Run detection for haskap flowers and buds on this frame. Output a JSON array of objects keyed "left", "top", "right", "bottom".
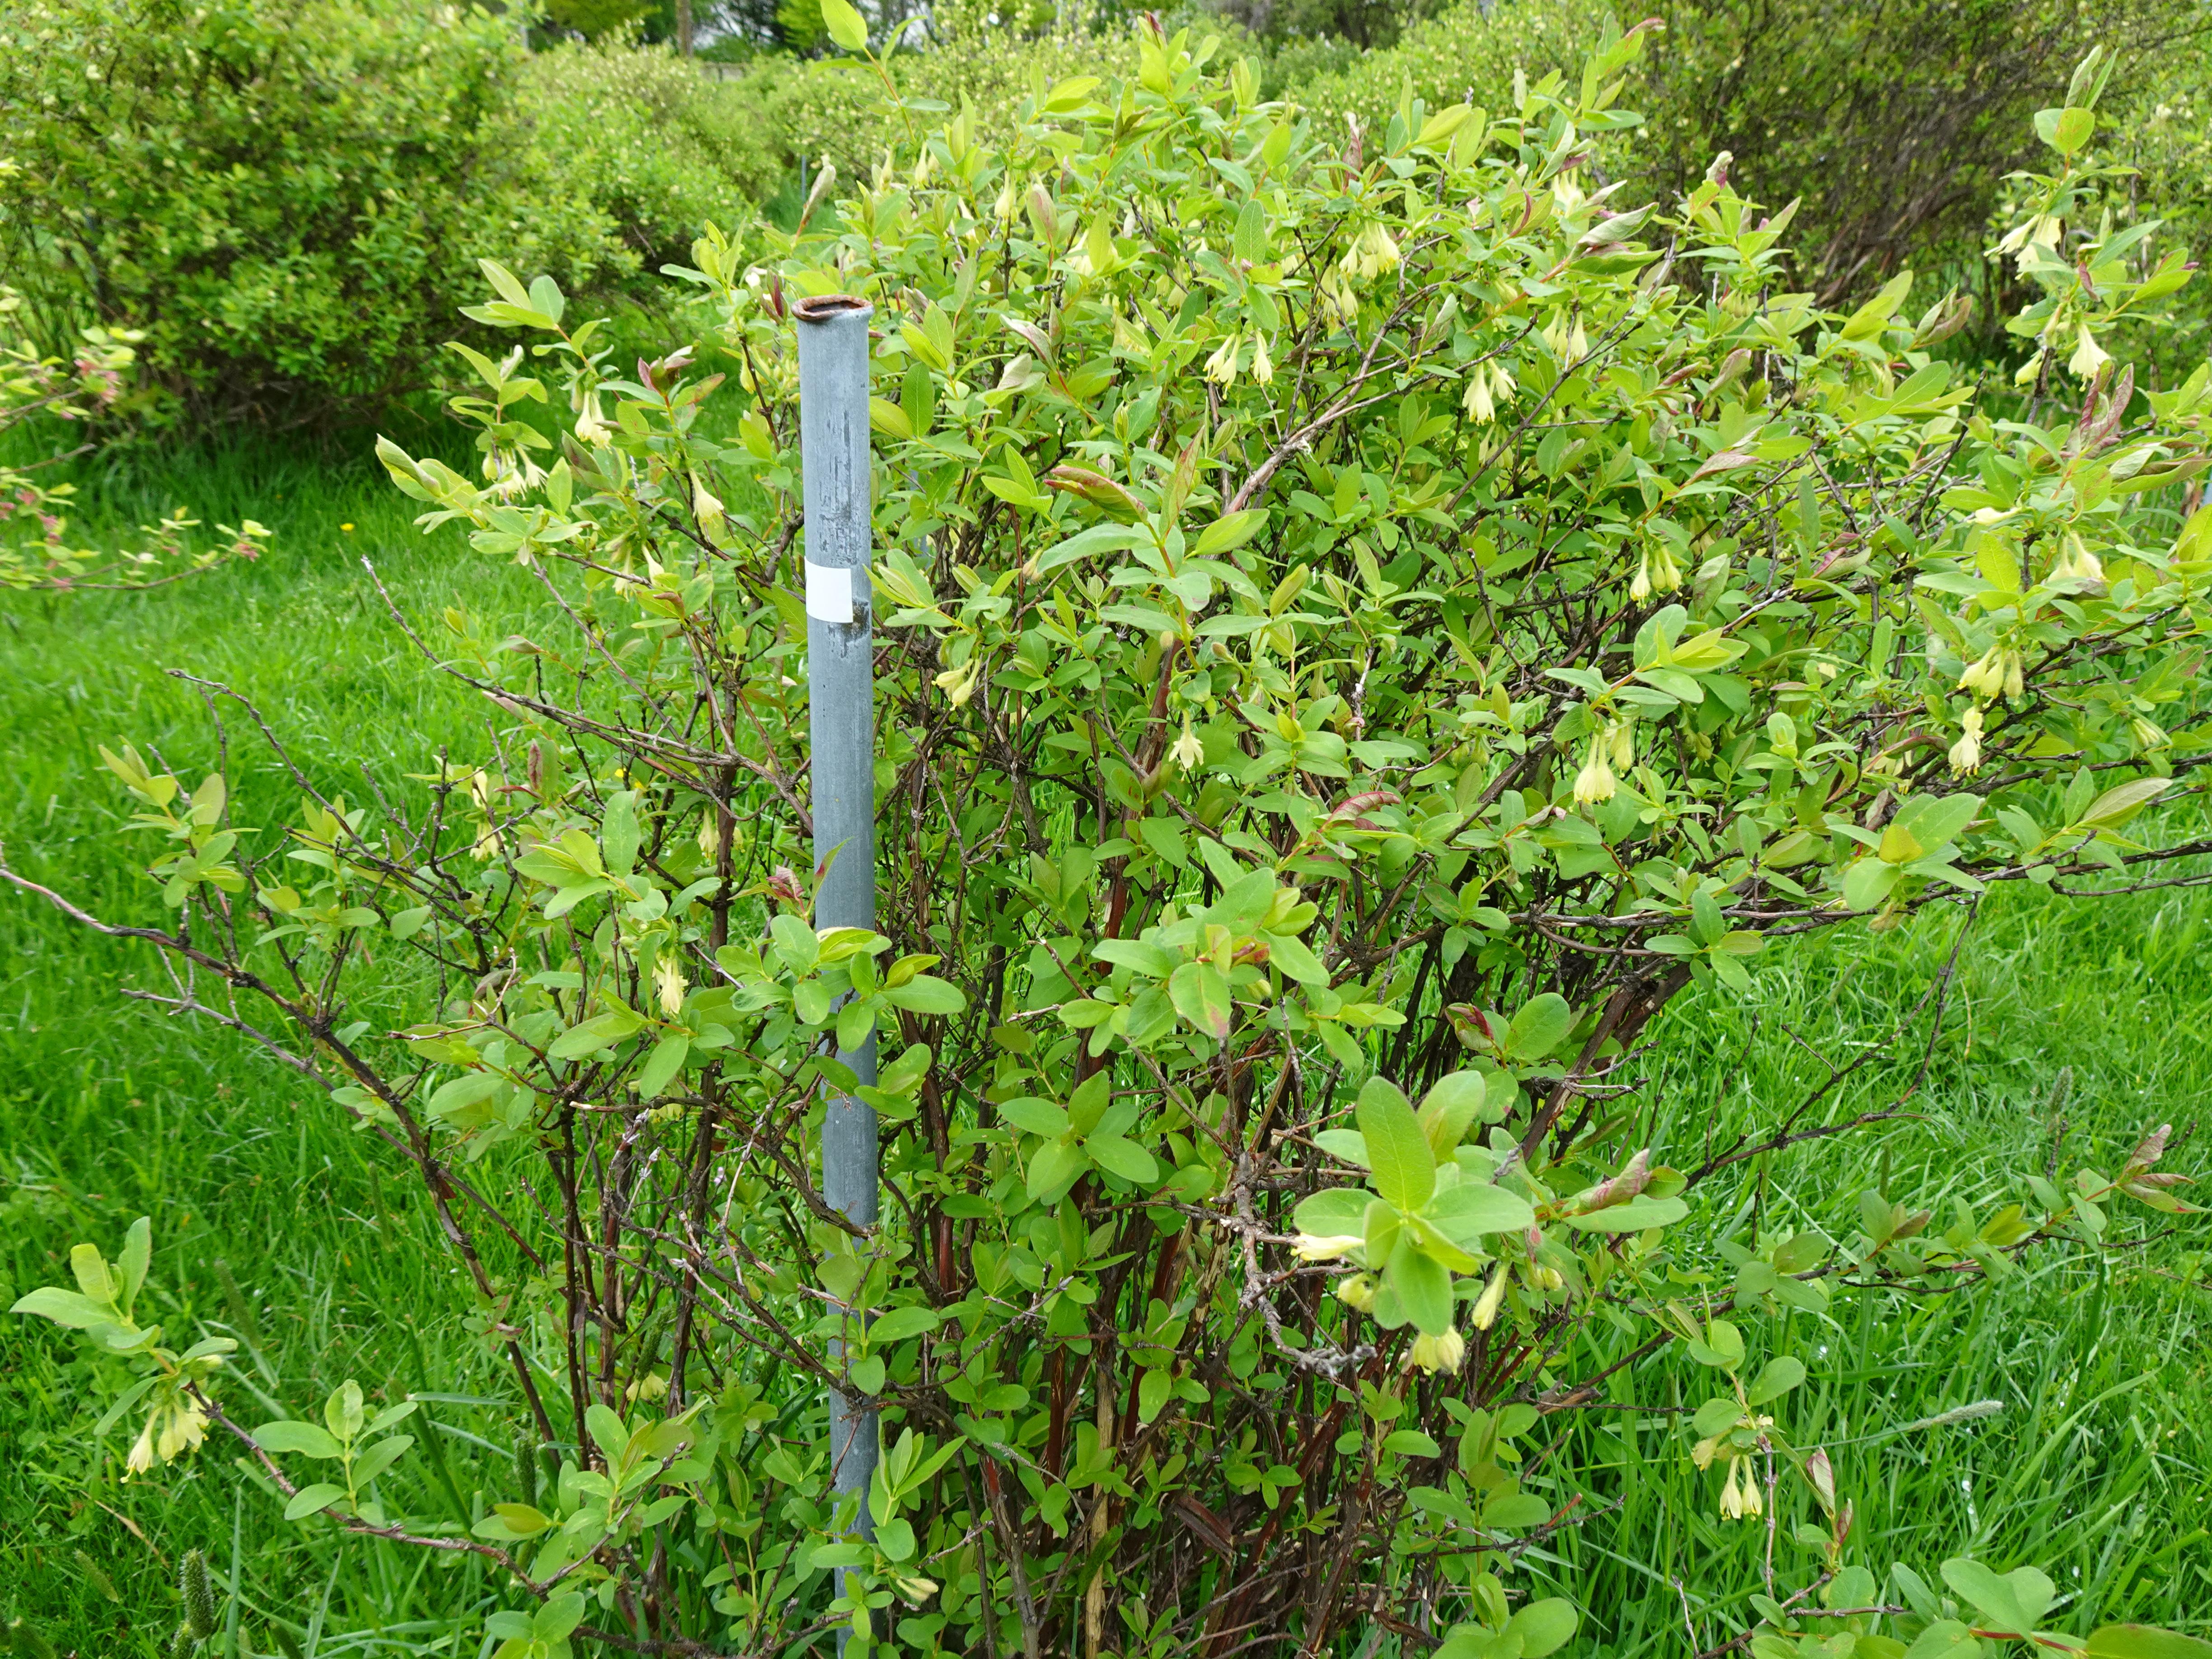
[
  {"left": 1662, "top": 547, "right": 1683, "bottom": 591},
  {"left": 592, "top": 394, "right": 613, "bottom": 450},
  {"left": 1411, "top": 1331, "right": 1440, "bottom": 1374},
  {"left": 2046, "top": 534, "right": 2073, "bottom": 585},
  {"left": 930, "top": 659, "right": 970, "bottom": 686},
  {"left": 482, "top": 820, "right": 509, "bottom": 857},
  {"left": 1322, "top": 267, "right": 1341, "bottom": 323},
  {"left": 1572, "top": 735, "right": 1599, "bottom": 803},
  {"left": 174, "top": 1398, "right": 206, "bottom": 1451},
  {"left": 1251, "top": 329, "right": 1272, "bottom": 383},
  {"left": 1078, "top": 254, "right": 1094, "bottom": 276},
  {"left": 1593, "top": 734, "right": 1615, "bottom": 801},
  {"left": 640, "top": 1379, "right": 654, "bottom": 1399},
  {"left": 901, "top": 1572, "right": 941, "bottom": 1595},
  {"left": 914, "top": 142, "right": 927, "bottom": 184},
  {"left": 2083, "top": 324, "right": 2111, "bottom": 372},
  {"left": 894, "top": 1578, "right": 928, "bottom": 1603},
  {"left": 1314, "top": 264, "right": 1333, "bottom": 305},
  {"left": 472, "top": 821, "right": 488, "bottom": 861},
  {"left": 1155, "top": 274, "right": 1171, "bottom": 296},
  {"left": 948, "top": 660, "right": 979, "bottom": 709},
  {"left": 1204, "top": 332, "right": 1236, "bottom": 383},
  {"left": 1462, "top": 361, "right": 1494, "bottom": 425},
  {"left": 1486, "top": 358, "right": 1516, "bottom": 400},
  {"left": 1023, "top": 548, "right": 1041, "bottom": 578},
  {"left": 1158, "top": 200, "right": 1167, "bottom": 222},
  {"left": 1152, "top": 199, "right": 1163, "bottom": 223},
  {"left": 1066, "top": 229, "right": 1088, "bottom": 268},
  {"left": 641, "top": 543, "right": 665, "bottom": 588},
  {"left": 2005, "top": 652, "right": 2024, "bottom": 698},
  {"left": 1196, "top": 228, "right": 1209, "bottom": 256},
  {"left": 1476, "top": 1263, "right": 1510, "bottom": 1328},
  {"left": 626, "top": 1378, "right": 639, "bottom": 1401},
  {"left": 1948, "top": 705, "right": 1982, "bottom": 779},
  {"left": 957, "top": 197, "right": 977, "bottom": 239},
  {"left": 1980, "top": 650, "right": 2009, "bottom": 697},
  {"left": 1549, "top": 173, "right": 1567, "bottom": 215},
  {"left": 473, "top": 765, "right": 487, "bottom": 811},
  {"left": 1374, "top": 221, "right": 1392, "bottom": 275},
  {"left": 2072, "top": 532, "right": 2106, "bottom": 582},
  {"left": 657, "top": 959, "right": 681, "bottom": 1014},
  {"left": 1555, "top": 309, "right": 1572, "bottom": 357},
  {"left": 1629, "top": 548, "right": 1651, "bottom": 601},
  {"left": 1570, "top": 310, "right": 1589, "bottom": 359},
  {"left": 122, "top": 1404, "right": 159, "bottom": 1482},
  {"left": 1975, "top": 506, "right": 2019, "bottom": 525},
  {"left": 1362, "top": 219, "right": 1378, "bottom": 255},
  {"left": 650, "top": 1371, "right": 670, "bottom": 1395},
  {"left": 2131, "top": 715, "right": 2161, "bottom": 747},
  {"left": 1339, "top": 274, "right": 1360, "bottom": 321},
  {"left": 1101, "top": 293, "right": 1111, "bottom": 308},
  {"left": 1616, "top": 724, "right": 1633, "bottom": 768},
  {"left": 1719, "top": 1454, "right": 1743, "bottom": 1520},
  {"left": 1739, "top": 1452, "right": 1764, "bottom": 1517},
  {"left": 1542, "top": 307, "right": 1562, "bottom": 353},
  {"left": 698, "top": 807, "right": 715, "bottom": 853},
  {"left": 2046, "top": 217, "right": 2061, "bottom": 249},
  {"left": 613, "top": 546, "right": 637, "bottom": 603},
  {"left": 505, "top": 450, "right": 530, "bottom": 500},
  {"left": 1168, "top": 711, "right": 1204, "bottom": 769},
  {"left": 1437, "top": 1333, "right": 1461, "bottom": 1375},
  {"left": 927, "top": 152, "right": 940, "bottom": 173},
  {"left": 738, "top": 345, "right": 756, "bottom": 393},
  {"left": 1361, "top": 255, "right": 1378, "bottom": 281},
  {"left": 2040, "top": 217, "right": 2051, "bottom": 246},
  {"left": 1379, "top": 221, "right": 1397, "bottom": 269},
  {"left": 159, "top": 1403, "right": 182, "bottom": 1460},
  {"left": 1169, "top": 262, "right": 1189, "bottom": 308},
  {"left": 1339, "top": 1271, "right": 1368, "bottom": 1306},
  {"left": 1501, "top": 425, "right": 1514, "bottom": 469},
  {"left": 1487, "top": 425, "right": 1505, "bottom": 468},
  {"left": 2017, "top": 213, "right": 2043, "bottom": 279},
  {"left": 1959, "top": 642, "right": 1994, "bottom": 688},
  {"left": 1216, "top": 335, "right": 1245, "bottom": 395},
  {"left": 1693, "top": 1428, "right": 1731, "bottom": 1471},
  {"left": 652, "top": 968, "right": 688, "bottom": 1000},
  {"left": 995, "top": 171, "right": 1010, "bottom": 219},
  {"left": 1337, "top": 232, "right": 1365, "bottom": 279},
  {"left": 1479, "top": 422, "right": 1497, "bottom": 465},
  {"left": 1566, "top": 166, "right": 1584, "bottom": 208},
  {"left": 1289, "top": 1233, "right": 1369, "bottom": 1262},
  {"left": 519, "top": 447, "right": 553, "bottom": 494},
  {"left": 753, "top": 344, "right": 771, "bottom": 387},
  {"left": 689, "top": 466, "right": 724, "bottom": 525},
  {"left": 2069, "top": 327, "right": 2100, "bottom": 383},
  {"left": 1558, "top": 169, "right": 1572, "bottom": 195},
  {"left": 2015, "top": 350, "right": 2044, "bottom": 387},
  {"left": 1543, "top": 1264, "right": 1562, "bottom": 1291},
  {"left": 1985, "top": 214, "right": 2039, "bottom": 257},
  {"left": 573, "top": 390, "right": 594, "bottom": 442},
  {"left": 1112, "top": 293, "right": 1119, "bottom": 309},
  {"left": 1446, "top": 1324, "right": 1468, "bottom": 1357},
  {"left": 1650, "top": 550, "right": 1666, "bottom": 589},
  {"left": 1032, "top": 551, "right": 1045, "bottom": 586},
  {"left": 1281, "top": 238, "right": 1301, "bottom": 274}
]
